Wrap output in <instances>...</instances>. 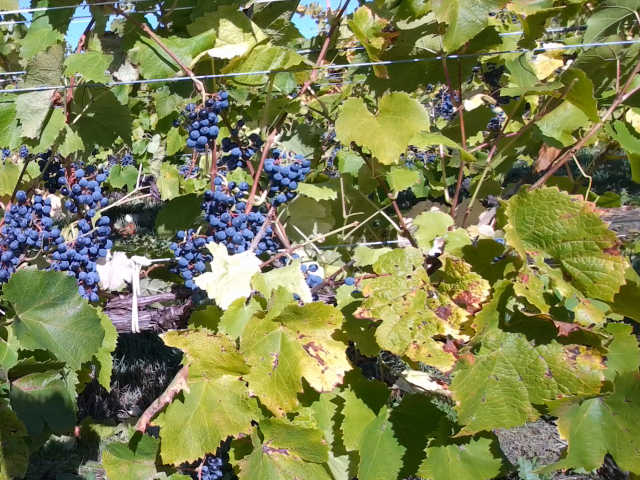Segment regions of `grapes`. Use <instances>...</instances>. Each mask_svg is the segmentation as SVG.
Masks as SVG:
<instances>
[{
    "label": "grapes",
    "mask_w": 640,
    "mask_h": 480,
    "mask_svg": "<svg viewBox=\"0 0 640 480\" xmlns=\"http://www.w3.org/2000/svg\"><path fill=\"white\" fill-rule=\"evenodd\" d=\"M15 198L18 200L17 205L12 204L10 210H6L3 215V221L8 226L1 228V234L6 236L0 238V279H10L15 273L14 265L19 263V257L16 250L22 245L42 246V238L44 240L51 239V244L56 249L51 254L53 262L45 267L47 272H61L67 270L71 277H75L77 282V292L83 300H89L97 303L100 296L98 284L101 276L97 273L98 258H105L107 250L114 247V242L108 237L112 228L109 226L111 218L109 216H101L96 221L98 228L94 233H90L86 237H78L75 240L73 249L63 243L64 238L60 235V228L52 227L55 220L50 217L52 212V200L43 198L41 195L33 197L32 206H24V202L28 199V193L18 190ZM39 218V224L42 226V234L37 230L27 227L29 221L34 215ZM50 248L48 243L42 246V250L47 252Z\"/></svg>",
    "instance_id": "obj_1"
},
{
    "label": "grapes",
    "mask_w": 640,
    "mask_h": 480,
    "mask_svg": "<svg viewBox=\"0 0 640 480\" xmlns=\"http://www.w3.org/2000/svg\"><path fill=\"white\" fill-rule=\"evenodd\" d=\"M223 180L215 177V191L206 190L204 192L203 202L200 209L204 211L205 221L212 227H218L220 230L207 231L206 237H196L193 240L192 235L197 232L195 227L188 229L186 232L178 230L176 238L184 240L181 245L179 242L171 241L169 248L175 256L180 257L178 265H170L168 271L171 274L181 273L186 280L185 288L195 292L198 286L195 284L192 274L204 273L207 269L206 262H212L214 256L212 254L203 255L198 249L199 246H206L210 242H219L233 254H240L250 248V242L257 236L262 225L266 222V217L259 211L243 213L246 204L239 200L245 196L244 191L250 189L247 181H241L238 184L231 181L228 184L230 190L236 187L239 190L235 196H228L221 186Z\"/></svg>",
    "instance_id": "obj_2"
},
{
    "label": "grapes",
    "mask_w": 640,
    "mask_h": 480,
    "mask_svg": "<svg viewBox=\"0 0 640 480\" xmlns=\"http://www.w3.org/2000/svg\"><path fill=\"white\" fill-rule=\"evenodd\" d=\"M53 156V152L48 150L46 153L40 155V160L37 162L38 170L43 172L42 180L46 182L44 187L50 194H55L60 190L62 196H68L70 199L63 203V207L66 211L72 214H78L80 208L71 200L76 199L79 205H88L86 215L89 218H94L97 212L94 210L99 202V208L104 210L109 205V199L103 196V190L100 188V182L107 179L105 173L97 174L94 180H86L85 177L91 176L97 171L95 165H87L85 169H77L74 172V178L78 181L71 185V190L67 184V178L64 176L66 169L61 167L59 162H53L49 159Z\"/></svg>",
    "instance_id": "obj_3"
},
{
    "label": "grapes",
    "mask_w": 640,
    "mask_h": 480,
    "mask_svg": "<svg viewBox=\"0 0 640 480\" xmlns=\"http://www.w3.org/2000/svg\"><path fill=\"white\" fill-rule=\"evenodd\" d=\"M281 149L275 147L272 150L273 158L266 159L264 163V173L268 175V180L272 183L267 197L272 200V205L278 207L280 204H286L296 196L294 191L287 192L284 195L276 192L281 187H288L290 190H295L298 187V182H304L307 179V174L312 172L311 161L304 159L302 154H295L293 159L298 162L291 163L287 166L275 165L276 160L280 158ZM283 160L287 159V153L281 154Z\"/></svg>",
    "instance_id": "obj_4"
},
{
    "label": "grapes",
    "mask_w": 640,
    "mask_h": 480,
    "mask_svg": "<svg viewBox=\"0 0 640 480\" xmlns=\"http://www.w3.org/2000/svg\"><path fill=\"white\" fill-rule=\"evenodd\" d=\"M216 97L209 98L206 101L207 108H201L198 113L194 110L198 107L196 102H190L184 106V110L189 113L190 120H196L187 125L188 137L184 140V145L188 148H195L198 152L206 149V144L211 139L219 136V116L223 109L229 107V93L227 91H219Z\"/></svg>",
    "instance_id": "obj_5"
},
{
    "label": "grapes",
    "mask_w": 640,
    "mask_h": 480,
    "mask_svg": "<svg viewBox=\"0 0 640 480\" xmlns=\"http://www.w3.org/2000/svg\"><path fill=\"white\" fill-rule=\"evenodd\" d=\"M248 139L253 142V145L251 148L244 149L243 151L237 146L236 142H231L229 137H224L222 139V151L224 153H228L230 151V155L222 158V162L227 164V169L229 171H234L236 168L245 169L247 164L243 160L249 159L263 144L262 138L256 133H250L248 135Z\"/></svg>",
    "instance_id": "obj_6"
},
{
    "label": "grapes",
    "mask_w": 640,
    "mask_h": 480,
    "mask_svg": "<svg viewBox=\"0 0 640 480\" xmlns=\"http://www.w3.org/2000/svg\"><path fill=\"white\" fill-rule=\"evenodd\" d=\"M274 234L275 231L271 228V226H268L264 230V233L260 238V242L257 244V248L254 250V253L257 257H261L264 254L265 249H270L271 252H275L277 250L278 242L272 237Z\"/></svg>",
    "instance_id": "obj_7"
},
{
    "label": "grapes",
    "mask_w": 640,
    "mask_h": 480,
    "mask_svg": "<svg viewBox=\"0 0 640 480\" xmlns=\"http://www.w3.org/2000/svg\"><path fill=\"white\" fill-rule=\"evenodd\" d=\"M300 270L302 271L303 274H306L307 271L309 272H317L319 270V266L315 263H311L308 265V268L306 265L301 264L300 265Z\"/></svg>",
    "instance_id": "obj_8"
}]
</instances>
